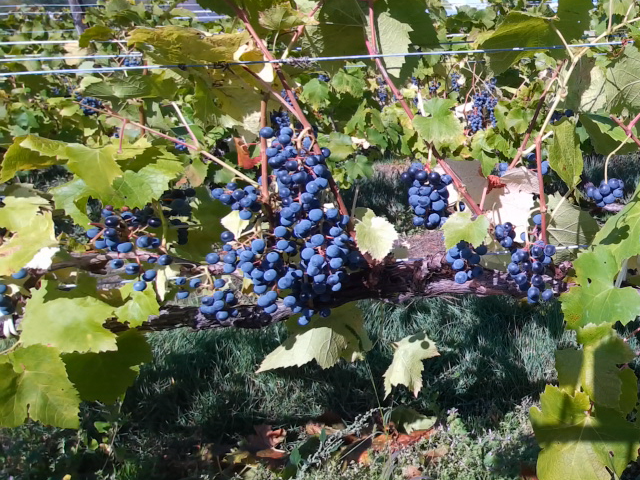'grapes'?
Wrapping results in <instances>:
<instances>
[{"label":"grapes","mask_w":640,"mask_h":480,"mask_svg":"<svg viewBox=\"0 0 640 480\" xmlns=\"http://www.w3.org/2000/svg\"><path fill=\"white\" fill-rule=\"evenodd\" d=\"M259 135L270 139L271 147L268 148V166L274 169L277 177V196L281 198L280 204L284 206L278 211L280 224L273 232L277 239L272 252H268L260 267H254L252 263L259 252L265 249L264 239H253L249 246L232 249L231 244H223L224 255L223 272L234 273L240 269L247 280L251 279L253 291L260 295L256 305L263 307L270 314L276 309L275 300L278 294L275 290L268 289V284L276 283L279 289H292L290 295H286L285 306L293 309L295 313L302 315L297 319L299 326H306L312 321L315 309L309 307V299L321 294L319 300L328 302L333 293H339L342 288V278L347 275V266L350 270H357L359 265L365 262L364 255L358 250H351L346 242L353 243L354 238L342 233L350 223V216H339L337 209L329 208L327 212L321 209V201L317 197L321 190L328 186L330 172L327 170L325 158L331 156L328 146H321L320 152L310 155L311 142L308 137L303 139L304 150L300 156L305 159V165L312 167L310 174L303 166L299 167L298 161H290L299 155V151L291 142L293 129L281 127L278 131L270 126L261 127ZM331 221L322 224L323 235L314 234L307 242H303L297 249L295 241H288L292 237L296 240L305 239L322 219ZM295 257L298 253L301 260L298 267L289 264L282 267V254ZM304 272L312 277L313 284L301 282Z\"/></svg>","instance_id":"1"},{"label":"grapes","mask_w":640,"mask_h":480,"mask_svg":"<svg viewBox=\"0 0 640 480\" xmlns=\"http://www.w3.org/2000/svg\"><path fill=\"white\" fill-rule=\"evenodd\" d=\"M400 180L412 185L408 189V204L413 207L416 214L413 217L415 226H422L428 230L436 229L443 221V217L437 213L448 207L449 191L445 188L452 183L448 173L424 171V165L420 162L412 163L406 172L400 174Z\"/></svg>","instance_id":"2"},{"label":"grapes","mask_w":640,"mask_h":480,"mask_svg":"<svg viewBox=\"0 0 640 480\" xmlns=\"http://www.w3.org/2000/svg\"><path fill=\"white\" fill-rule=\"evenodd\" d=\"M557 250L553 244H544L543 240H537L531 249V257L533 259H539L533 263L529 260V253L524 249H513L510 252L511 262L507 266V272L512 278H514L515 284L521 291L527 293V302L529 304H536L538 297L540 296V288L544 285L543 278L539 274L545 266H549L552 263L551 256L556 254ZM522 262V270L524 272H532L534 275L528 282L529 275L527 273H521L519 263Z\"/></svg>","instance_id":"3"},{"label":"grapes","mask_w":640,"mask_h":480,"mask_svg":"<svg viewBox=\"0 0 640 480\" xmlns=\"http://www.w3.org/2000/svg\"><path fill=\"white\" fill-rule=\"evenodd\" d=\"M225 188L232 192L226 194L223 188H213L211 195L224 206H230L233 211H240L239 217L249 220L253 217V212H259L263 209V205L258 201L260 191L251 185L244 186L242 190L235 182H227Z\"/></svg>","instance_id":"4"},{"label":"grapes","mask_w":640,"mask_h":480,"mask_svg":"<svg viewBox=\"0 0 640 480\" xmlns=\"http://www.w3.org/2000/svg\"><path fill=\"white\" fill-rule=\"evenodd\" d=\"M477 254L472 253L470 247H466V243L461 241L455 247L450 248L446 253V262L451 264L454 272L455 283L460 286L464 285L467 281L473 278L480 277L482 275V269L479 266H474L471 270L462 271L465 267V261L470 264H478L481 261V257L486 254L487 247L481 245L475 249Z\"/></svg>","instance_id":"5"},{"label":"grapes","mask_w":640,"mask_h":480,"mask_svg":"<svg viewBox=\"0 0 640 480\" xmlns=\"http://www.w3.org/2000/svg\"><path fill=\"white\" fill-rule=\"evenodd\" d=\"M237 302L238 299L234 296L233 290H218L213 293V296L201 298L199 310L203 315H215L217 321H220L228 317H236L239 314L235 307L224 306L225 303L233 306Z\"/></svg>","instance_id":"6"},{"label":"grapes","mask_w":640,"mask_h":480,"mask_svg":"<svg viewBox=\"0 0 640 480\" xmlns=\"http://www.w3.org/2000/svg\"><path fill=\"white\" fill-rule=\"evenodd\" d=\"M101 216L103 224L106 229L103 231L104 239H96L94 241V247L98 250H105L109 247V251L113 253L125 254L134 249V244L131 241H120L117 237L116 227L120 223V219L116 214H113L112 210L103 208L101 210Z\"/></svg>","instance_id":"7"},{"label":"grapes","mask_w":640,"mask_h":480,"mask_svg":"<svg viewBox=\"0 0 640 480\" xmlns=\"http://www.w3.org/2000/svg\"><path fill=\"white\" fill-rule=\"evenodd\" d=\"M625 181L622 178L613 176L607 181L602 179L598 187L588 185L586 187V196L594 199V205L597 208H604L606 205H612L617 198L625 195Z\"/></svg>","instance_id":"8"},{"label":"grapes","mask_w":640,"mask_h":480,"mask_svg":"<svg viewBox=\"0 0 640 480\" xmlns=\"http://www.w3.org/2000/svg\"><path fill=\"white\" fill-rule=\"evenodd\" d=\"M196 191L193 188L181 189H167L161 195L162 206L170 207L172 210H163L164 218L168 219L171 216L191 217L192 207L190 204L186 205V197H195Z\"/></svg>","instance_id":"9"},{"label":"grapes","mask_w":640,"mask_h":480,"mask_svg":"<svg viewBox=\"0 0 640 480\" xmlns=\"http://www.w3.org/2000/svg\"><path fill=\"white\" fill-rule=\"evenodd\" d=\"M153 215V208H144L142 211H137L136 213H132L129 210L121 212L123 219H130L127 223L128 227L145 226L146 223H148L151 228H159L161 226V220L158 217H153Z\"/></svg>","instance_id":"10"},{"label":"grapes","mask_w":640,"mask_h":480,"mask_svg":"<svg viewBox=\"0 0 640 480\" xmlns=\"http://www.w3.org/2000/svg\"><path fill=\"white\" fill-rule=\"evenodd\" d=\"M494 235L495 240L499 242L504 249H510L517 237V233L512 231V225L509 222H505L503 225L497 224L494 227Z\"/></svg>","instance_id":"11"},{"label":"grapes","mask_w":640,"mask_h":480,"mask_svg":"<svg viewBox=\"0 0 640 480\" xmlns=\"http://www.w3.org/2000/svg\"><path fill=\"white\" fill-rule=\"evenodd\" d=\"M6 291L7 285L5 283H0V311L3 315L12 314L17 305L16 300H12L9 296L3 294Z\"/></svg>","instance_id":"12"},{"label":"grapes","mask_w":640,"mask_h":480,"mask_svg":"<svg viewBox=\"0 0 640 480\" xmlns=\"http://www.w3.org/2000/svg\"><path fill=\"white\" fill-rule=\"evenodd\" d=\"M157 276V271L153 268H149L142 273V279L133 283L132 290L136 292L145 291L147 288L146 282H152Z\"/></svg>","instance_id":"13"},{"label":"grapes","mask_w":640,"mask_h":480,"mask_svg":"<svg viewBox=\"0 0 640 480\" xmlns=\"http://www.w3.org/2000/svg\"><path fill=\"white\" fill-rule=\"evenodd\" d=\"M135 245L138 246L139 248H146L148 250H154V249H157L159 247L160 238L159 237L143 235L141 237H138L135 240Z\"/></svg>","instance_id":"14"}]
</instances>
